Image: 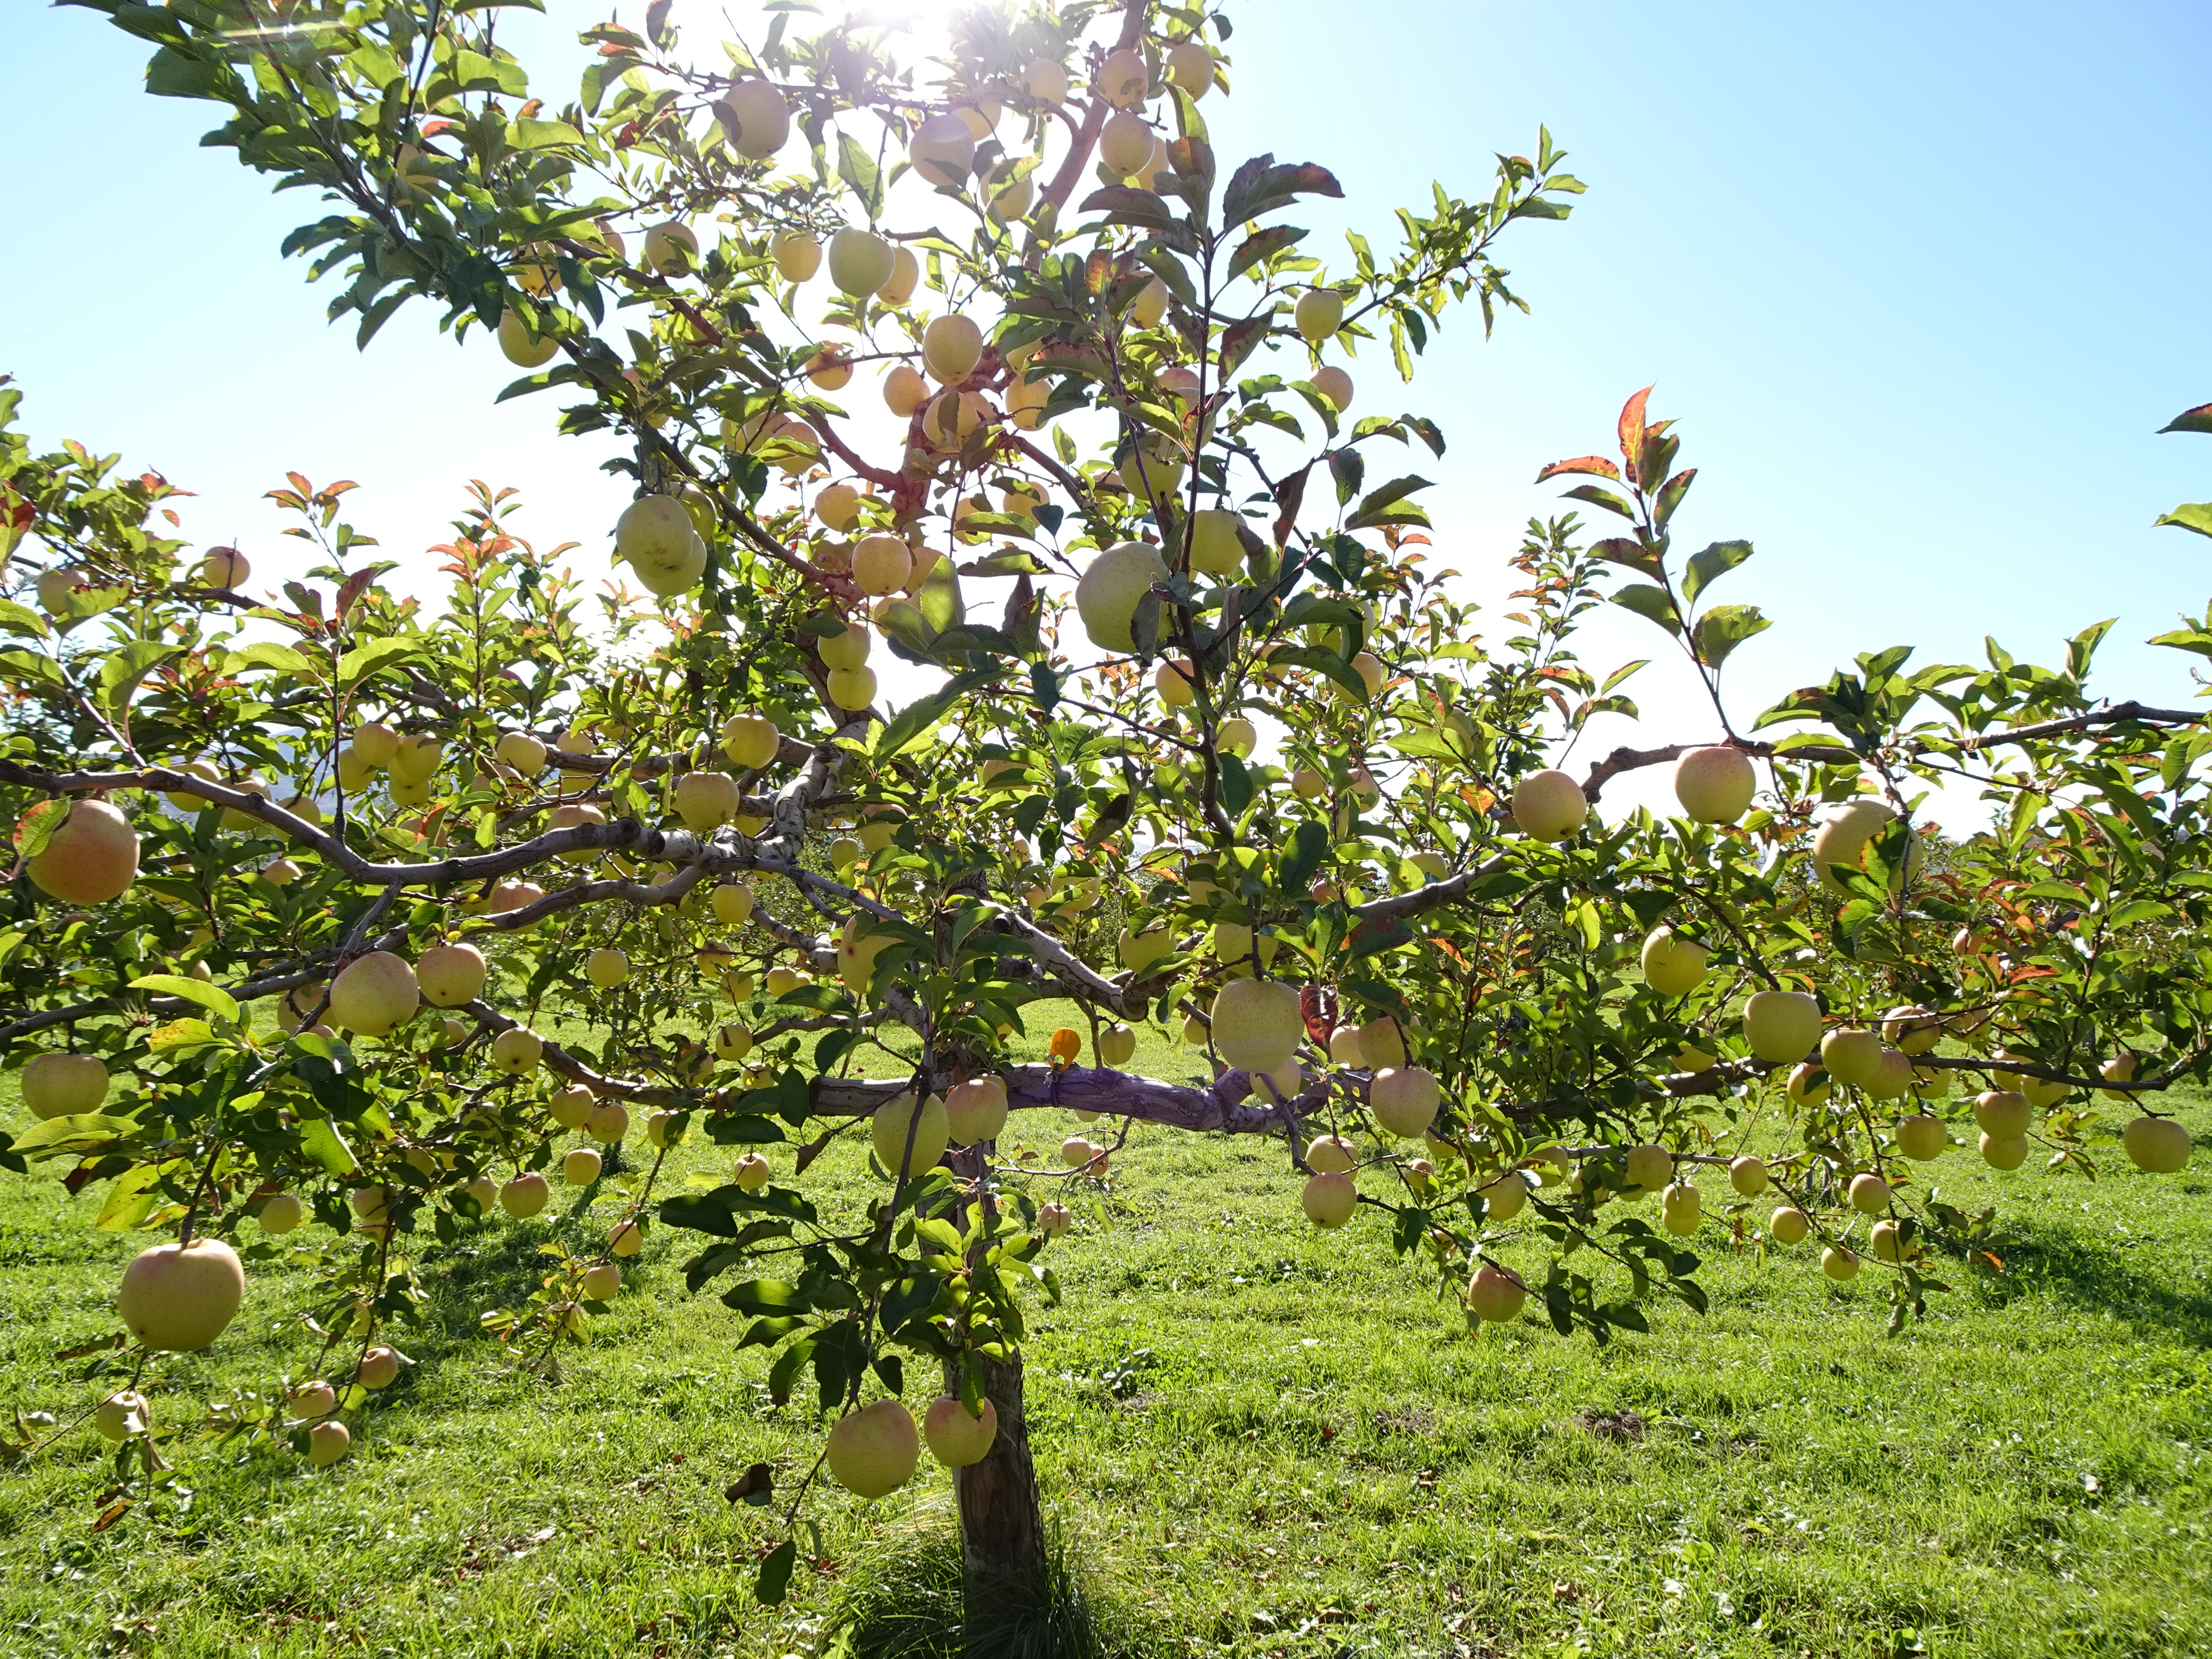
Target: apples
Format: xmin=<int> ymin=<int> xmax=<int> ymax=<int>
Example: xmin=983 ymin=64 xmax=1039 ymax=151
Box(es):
xmin=599 ymin=694 xmax=639 ymax=740
xmin=924 ymin=314 xmax=983 ymax=377
xmin=362 ymin=1215 xmax=399 ymax=1242
xmin=1907 ymin=1066 xmax=1951 ymax=1099
xmin=571 ymin=1098 xmax=600 ymax=1132
xmin=1742 ymin=991 xmax=1821 ymax=1063
xmin=1215 ymin=718 xmax=1256 ymax=761
xmin=1770 ymin=1207 xmax=1808 ymax=1245
xmin=752 ymin=870 xmax=779 ymax=880
xmin=353 ymin=1183 xmax=390 ymax=1220
xmin=190 ymin=959 xmax=212 ymax=983
xmin=1870 ymin=1219 xmax=1914 ymax=1263
xmin=767 ymin=967 xmax=798 ymax=997
xmin=544 ymin=1301 xmax=583 ymax=1339
xmin=609 ymin=1220 xmax=643 ymax=1257
xmin=1895 ymin=1113 xmax=1947 ymax=1161
xmin=904 ymin=546 xmax=948 ymax=594
xmin=1097 ymin=50 xmax=1149 ymax=108
xmin=1188 ymin=509 xmax=1248 ymax=575
xmin=1134 ymin=135 xmax=1169 ymax=193
xmin=1156 ymin=659 xmax=1194 ymax=705
xmin=796 ymin=973 xmax=811 ymax=989
xmin=1369 ymin=1066 xmax=1441 ymax=1138
xmin=1003 ymin=481 xmax=1050 ymax=529
xmin=440 ymin=1152 xmax=456 ymax=1169
xmin=1076 ymin=541 xmax=1178 ymax=653
xmin=1165 ymin=44 xmax=1214 ymax=103
xmin=1525 ymin=1145 xmax=1568 ymax=1187
xmin=601 ymin=852 xmax=635 ymax=880
xmin=490 ymin=882 xmax=543 ymax=914
xmin=1040 ymin=1202 xmax=1071 ymax=1238
xmin=342 ymin=1301 xmax=371 ymax=1334
xmin=950 ymin=103 xmax=1001 ymax=141
xmin=851 ymin=534 xmax=912 ymax=596
xmin=290 ymin=1380 xmax=335 ymax=1422
xmin=1979 ymin=1131 xmax=2027 ymax=1171
xmin=457 ymin=1176 xmax=496 ymax=1214
xmin=1255 ymin=641 xmax=1290 ymax=689
xmin=585 ymin=1101 xmax=628 ymax=1143
xmin=734 ymin=812 xmax=771 ymax=837
xmin=1099 ymin=111 xmax=1155 ymax=177
xmin=597 ymin=799 xmax=630 ymax=818
xmin=1625 ymin=1144 xmax=1672 ymax=1192
xmin=164 ymin=760 xmax=222 ymax=812
xmin=396 ymin=138 xmax=438 ymax=199
xmin=1184 ymin=1014 xmax=1214 ymax=1044
xmin=1118 ymin=918 xmax=1176 ymax=974
xmin=921 ymin=347 xmax=971 ymax=386
xmin=1570 ymin=1168 xmax=1609 ymax=1209
xmin=119 ymin=1238 xmax=245 ymax=1352
xmin=1005 ymin=376 xmax=1053 ymax=431
xmin=1947 ymin=1009 xmax=1991 ymax=1043
xmin=1357 ymin=1014 xmax=1421 ymax=1071
xmin=842 ymin=912 xmax=904 ymax=978
xmin=629 ymin=1055 xmax=658 ymax=1080
xmin=296 ymin=1025 xmax=338 ymax=1038
xmin=24 ymin=800 xmax=141 ymax=906
xmin=1952 ymin=928 xmax=1986 ymax=956
xmin=616 ymin=495 xmax=694 ymax=576
xmin=745 ymin=409 xmax=790 ymax=466
xmin=273 ymin=796 xmax=321 ymax=842
xmin=330 ymin=951 xmax=420 ymax=1037
xmin=1302 ymin=1172 xmax=1357 ymax=1229
xmin=909 ymin=114 xmax=975 ymax=186
xmin=21 ymin=1053 xmax=109 ymax=1121
xmin=923 ymin=1395 xmax=998 ymax=1467
xmin=1342 ymin=768 xmax=1379 ymax=813
xmin=1127 ymin=271 xmax=1169 ymax=330
xmin=980 ymin=159 xmax=1034 ymax=222
xmin=1006 ymin=340 xmax=1048 ymax=376
xmin=723 ymin=715 xmax=779 ymax=769
xmin=338 ymin=749 xmax=379 ymax=792
xmin=2113 ymin=1050 xmax=2157 ymax=1082
xmin=550 ymin=1084 xmax=594 ymax=1128
xmin=556 ymin=730 xmax=595 ymax=755
xmin=1859 ymin=1047 xmax=1912 ymax=1100
xmin=493 ymin=1026 xmax=543 ymax=1074
xmin=1641 ymin=925 xmax=1710 ymax=996
xmin=872 ymin=1091 xmax=950 ymax=1177
xmin=1196 ymin=997 xmax=1214 ymax=1016
xmin=1330 ymin=652 xmax=1383 ymax=704
xmin=621 ymin=366 xmax=671 ymax=420
xmin=501 ymin=1172 xmax=549 ymax=1218
xmin=672 ymin=1044 xmax=714 ymax=1086
xmin=1848 ymin=1174 xmax=1891 ymax=1214
xmin=772 ymin=422 xmax=819 ymax=475
xmin=514 ymin=241 xmax=563 ymax=297
xmin=2102 ymin=1062 xmax=2142 ymax=1102
xmin=393 ymin=1146 xmax=436 ymax=1178
xmin=1469 ymin=1265 xmax=1525 ymax=1322
xmin=394 ymin=732 xmax=441 ymax=780
xmin=805 ymin=340 xmax=853 ymax=391
xmin=1099 ymin=1023 xmax=1135 ymax=1065
xmin=1821 ymin=1246 xmax=1859 ymax=1281
xmin=388 ymin=777 xmax=431 ymax=809
xmin=1662 ymin=1183 xmax=1700 ymax=1219
xmin=1670 ymin=1027 xmax=1717 ymax=1073
xmin=1214 ymin=922 xmax=1278 ymax=974
xmin=1662 ymin=1207 xmax=1701 ymax=1236
xmin=1478 ymin=1170 xmax=1527 ymax=1221
xmin=564 ymin=1148 xmax=602 ymax=1186
xmin=216 ymin=775 xmax=271 ymax=831
xmin=712 ymin=884 xmax=753 ymax=924
xmin=1018 ymin=59 xmax=1068 ymax=115
xmin=36 ymin=568 xmax=89 ymax=617
xmin=1249 ymin=1056 xmax=1301 ymax=1107
xmin=838 ymin=940 xmax=868 ymax=993
xmin=96 ymin=1391 xmax=149 ymax=1440
xmin=387 ymin=757 xmax=432 ymax=789
xmin=858 ymin=804 xmax=909 ymax=852
xmin=633 ymin=530 xmax=707 ymax=596
xmin=416 ymin=942 xmax=486 ymax=1007
xmin=733 ymin=1153 xmax=769 ymax=1191
xmin=263 ymin=859 xmax=303 ymax=888
xmin=1050 ymin=873 xmax=1100 ymax=911
xmin=1405 ymin=1158 xmax=1435 ymax=1191
xmin=307 ymin=1421 xmax=349 ymax=1468
xmin=421 ymin=1075 xmax=461 ymax=1101
xmin=1052 ymin=908 xmax=1078 ymax=935
xmin=721 ymin=79 xmax=790 ymax=159
xmin=497 ymin=731 xmax=546 ymax=777
xmin=1425 ymin=1128 xmax=1458 ymax=1158
xmin=277 ymin=985 xmax=339 ymax=1032
xmin=719 ymin=971 xmax=754 ymax=1003
xmin=743 ymin=1062 xmax=775 ymax=1090
xmin=922 ymin=391 xmax=981 ymax=443
xmin=599 ymin=719 xmax=627 ymax=740
xmin=671 ymin=482 xmax=715 ymax=545
xmin=427 ymin=1020 xmax=467 ymax=1049
xmin=1618 ymin=1175 xmax=1646 ymax=1201
xmin=647 ymin=1110 xmax=686 ymax=1149
xmin=547 ymin=805 xmax=606 ymax=863
xmin=1157 ymin=368 xmax=1200 ymax=413
xmin=827 ymin=666 xmax=877 ymax=711
xmin=883 ymin=365 xmax=931 ymax=417
xmin=809 ymin=1008 xmax=824 ymax=1018
xmin=1026 ymin=883 xmax=1053 ymax=909
xmin=1882 ymin=1005 xmax=1940 ymax=1055
xmin=1118 ymin=431 xmax=1185 ymax=502
xmin=829 ymin=224 xmax=894 ymax=298
xmin=587 ymin=950 xmax=628 ymax=987
xmin=1009 ymin=839 xmax=1029 ymax=863
xmin=982 ymin=755 xmax=1035 ymax=794
xmin=473 ymin=765 xmax=523 ymax=819
xmin=570 ymin=222 xmax=625 ymax=260
xmin=258 ymin=1195 xmax=302 ymax=1234
xmin=203 ymin=546 xmax=250 ymax=589
xmin=770 ymin=228 xmax=822 ymax=282
xmin=461 ymin=1100 xmax=500 ymax=1139
xmin=1812 ymin=800 xmax=1921 ymax=897
xmin=826 ymin=1400 xmax=919 ymax=1498
xmin=975 ymin=1074 xmax=1007 ymax=1097
xmin=353 ymin=723 xmax=399 ymax=767
xmin=645 ymin=221 xmax=699 ymax=277
xmin=495 ymin=688 xmax=517 ymax=706
xmin=1295 ymin=289 xmax=1344 ymax=340
xmin=814 ymin=484 xmax=861 ymax=532
xmin=584 ymin=1265 xmax=620 ymax=1300
xmin=1990 ymin=1050 xmax=2036 ymax=1093
xmin=544 ymin=785 xmax=566 ymax=816
xmin=398 ymin=816 xmax=447 ymax=848
xmin=1674 ymin=746 xmax=1756 ymax=825
xmin=997 ymin=1022 xmax=1013 ymax=1038
xmin=497 ymin=302 xmax=560 ymax=367
xmin=1820 ymin=1027 xmax=1882 ymax=1084
xmin=876 ymin=246 xmax=919 ymax=305
xmin=676 ymin=771 xmax=739 ymax=830
xmin=1511 ymin=769 xmax=1587 ymax=843
xmin=1728 ymin=1156 xmax=1768 ymax=1197
xmin=818 ymin=623 xmax=870 ymax=673
xmin=356 ymin=1347 xmax=398 ymax=1389
xmin=1329 ymin=1026 xmax=1368 ymax=1069
xmin=1085 ymin=471 xmax=1130 ymax=510
xmin=1305 ymin=1135 xmax=1358 ymax=1182
xmin=2124 ymin=1117 xmax=2190 ymax=1173
xmin=1308 ymin=366 xmax=1354 ymax=414
xmin=720 ymin=418 xmax=750 ymax=454
xmin=963 ymin=390 xmax=997 ymax=424
xmin=1429 ymin=1229 xmax=1453 ymax=1241
xmin=560 ymin=768 xmax=599 ymax=794
xmin=456 ymin=876 xmax=503 ymax=914
xmin=955 ymin=497 xmax=980 ymax=545
xmin=716 ymin=1024 xmax=753 ymax=1061
xmin=1312 ymin=880 xmax=1340 ymax=905
xmin=1062 ymin=1137 xmax=1091 ymax=1167
xmin=1406 ymin=852 xmax=1447 ymax=882
xmin=1211 ymin=977 xmax=1304 ymax=1073
xmin=650 ymin=872 xmax=676 ymax=887
xmin=2020 ymin=1065 xmax=2071 ymax=1109
xmin=1080 ymin=1144 xmax=1109 ymax=1178
xmin=830 ymin=838 xmax=860 ymax=870
xmin=1787 ymin=1063 xmax=1831 ymax=1108
xmin=944 ymin=1079 xmax=1008 ymax=1146
xmin=1075 ymin=1109 xmax=1102 ymax=1122
xmin=1291 ymin=765 xmax=1326 ymax=799
xmin=873 ymin=596 xmax=907 ymax=638
xmin=696 ymin=943 xmax=732 ymax=977
xmin=1140 ymin=890 xmax=1151 ymax=907
xmin=1974 ymin=1091 xmax=2031 ymax=1140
